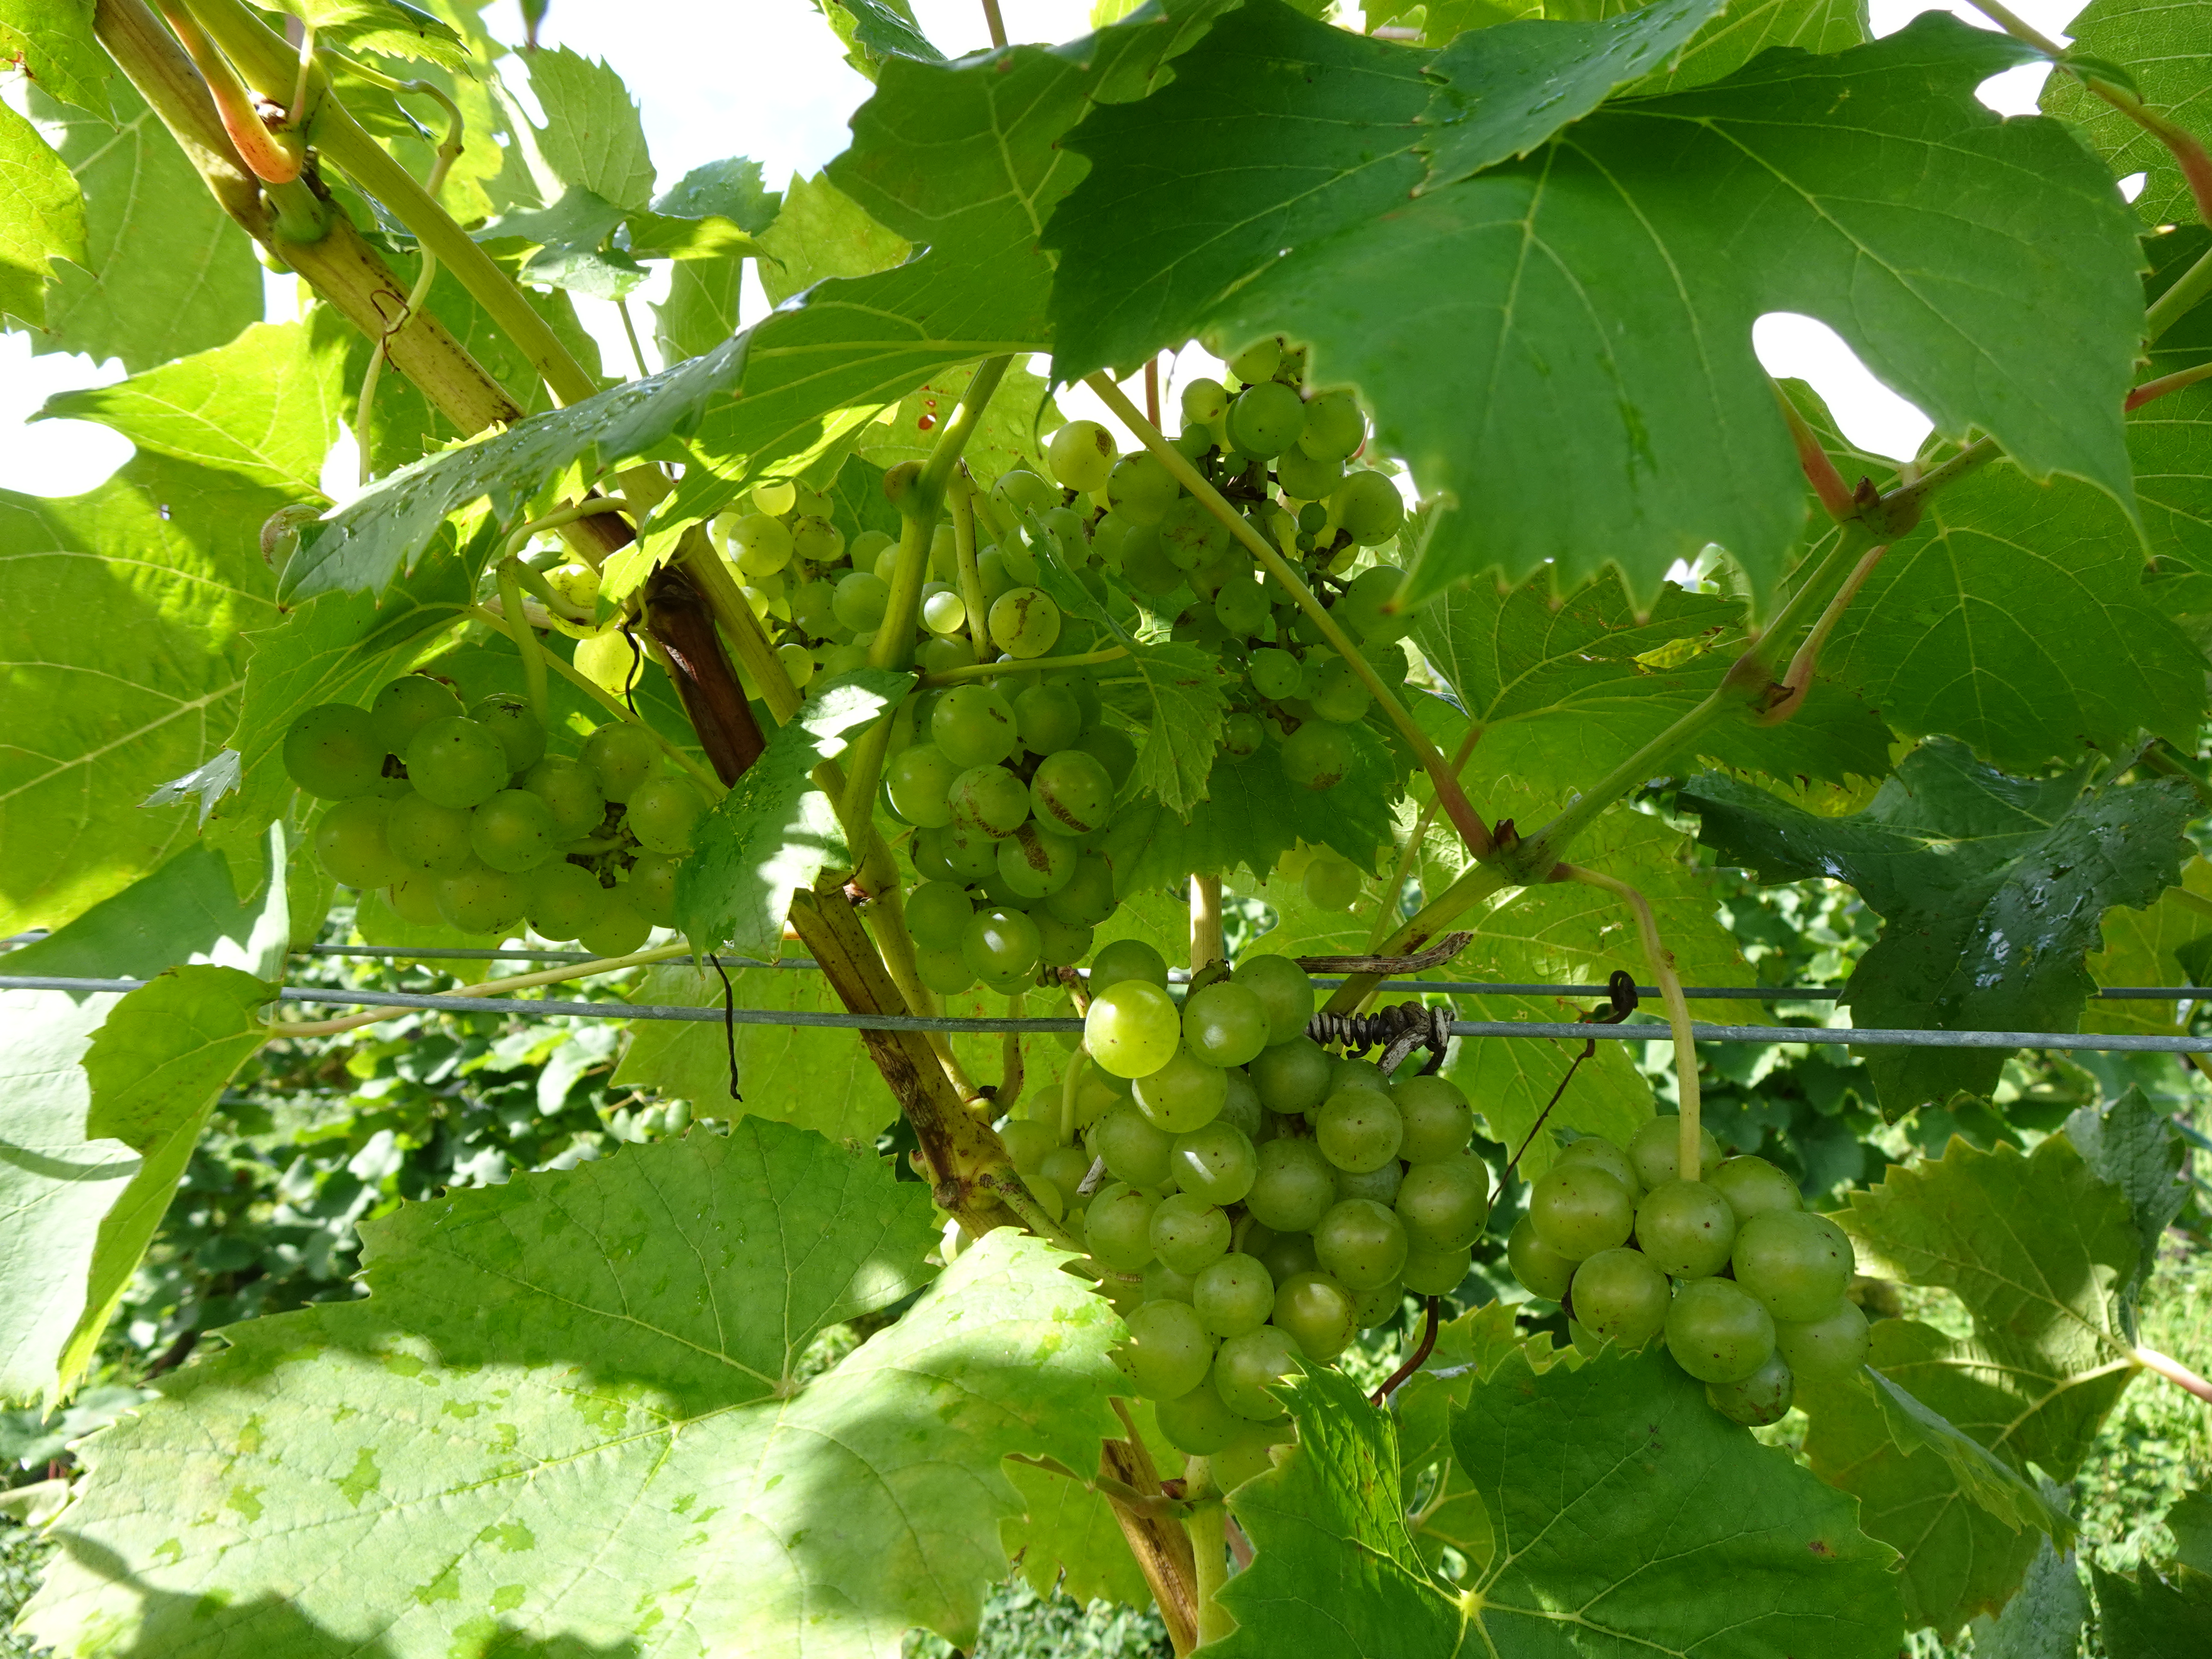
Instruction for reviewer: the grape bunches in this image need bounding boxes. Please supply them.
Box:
[927,420,1117,634]
[880,588,1136,994]
[1509,1115,1875,1427]
[1093,333,1412,793]
[535,559,645,697]
[708,474,934,713]
[280,674,566,982]
[998,943,1488,1498]
[1276,837,1363,909]
[524,722,715,959]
